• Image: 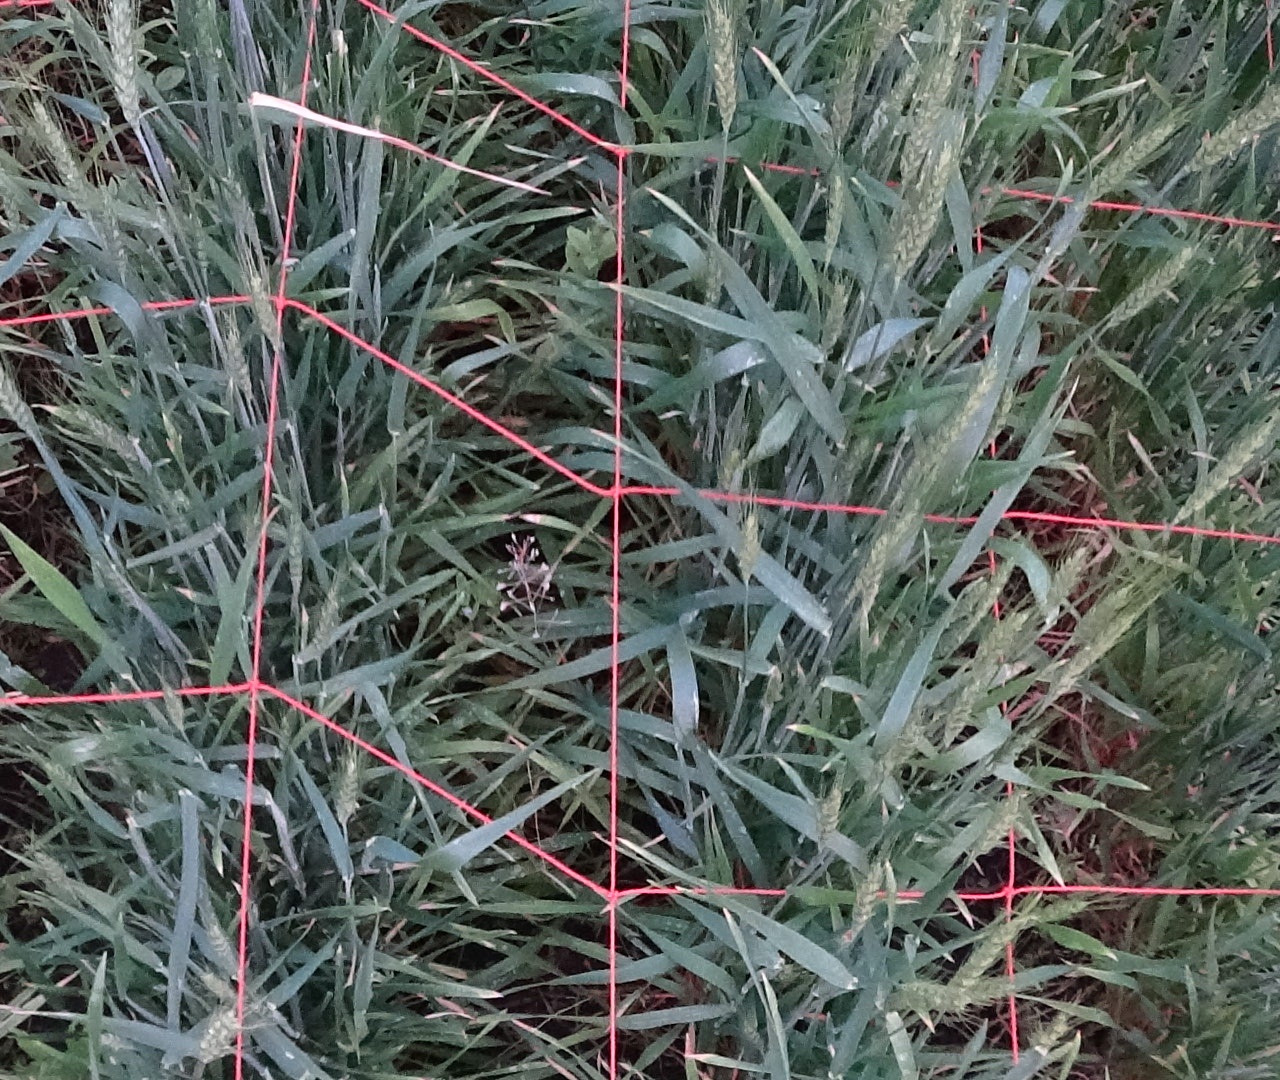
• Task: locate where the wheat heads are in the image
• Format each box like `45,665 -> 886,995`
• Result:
1068,121 -> 1180,196
283,504 -> 303,583
890,977 -> 945,1005
1108,247 -> 1190,319
824,432 -> 868,493
1176,408 -> 1278,522
249,277 -> 276,345
930,911 -> 1029,1023
737,508 -> 761,576
39,102 -> 90,219
201,971 -> 237,1003
863,632 -> 909,685
310,589 -> 335,658
196,1008 -> 236,1057
974,180 -> 1011,236
93,188 -> 126,272
35,852 -> 64,885
0,168 -> 19,231
1070,581 -> 1145,644
927,358 -> 996,474
98,556 -> 133,604
864,538 -> 890,600
960,980 -> 1022,1003
106,0 -> 145,135
820,781 -> 846,837
950,554 -> 1019,652
820,284 -> 847,354
903,35 -> 964,178
1040,1010 -> 1074,1052
203,922 -> 231,959
856,868 -> 883,929
866,66 -> 913,150
843,498 -> 924,606
722,447 -> 740,488
890,147 -> 957,280
336,753 -> 361,820
191,0 -> 222,78
218,326 -> 248,397
970,801 -> 1028,855
100,1029 -> 131,1051
1048,543 -> 1098,600
1191,90 -> 1280,167
191,212 -> 211,268
951,681 -> 979,737
824,178 -> 852,247
872,0 -> 913,51
1055,606 -> 1137,683
832,48 -> 863,136
700,249 -> 730,306
0,367 -> 33,424
710,6 -> 736,122
896,712 -> 927,765
1038,899 -> 1089,924
72,414 -> 137,456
